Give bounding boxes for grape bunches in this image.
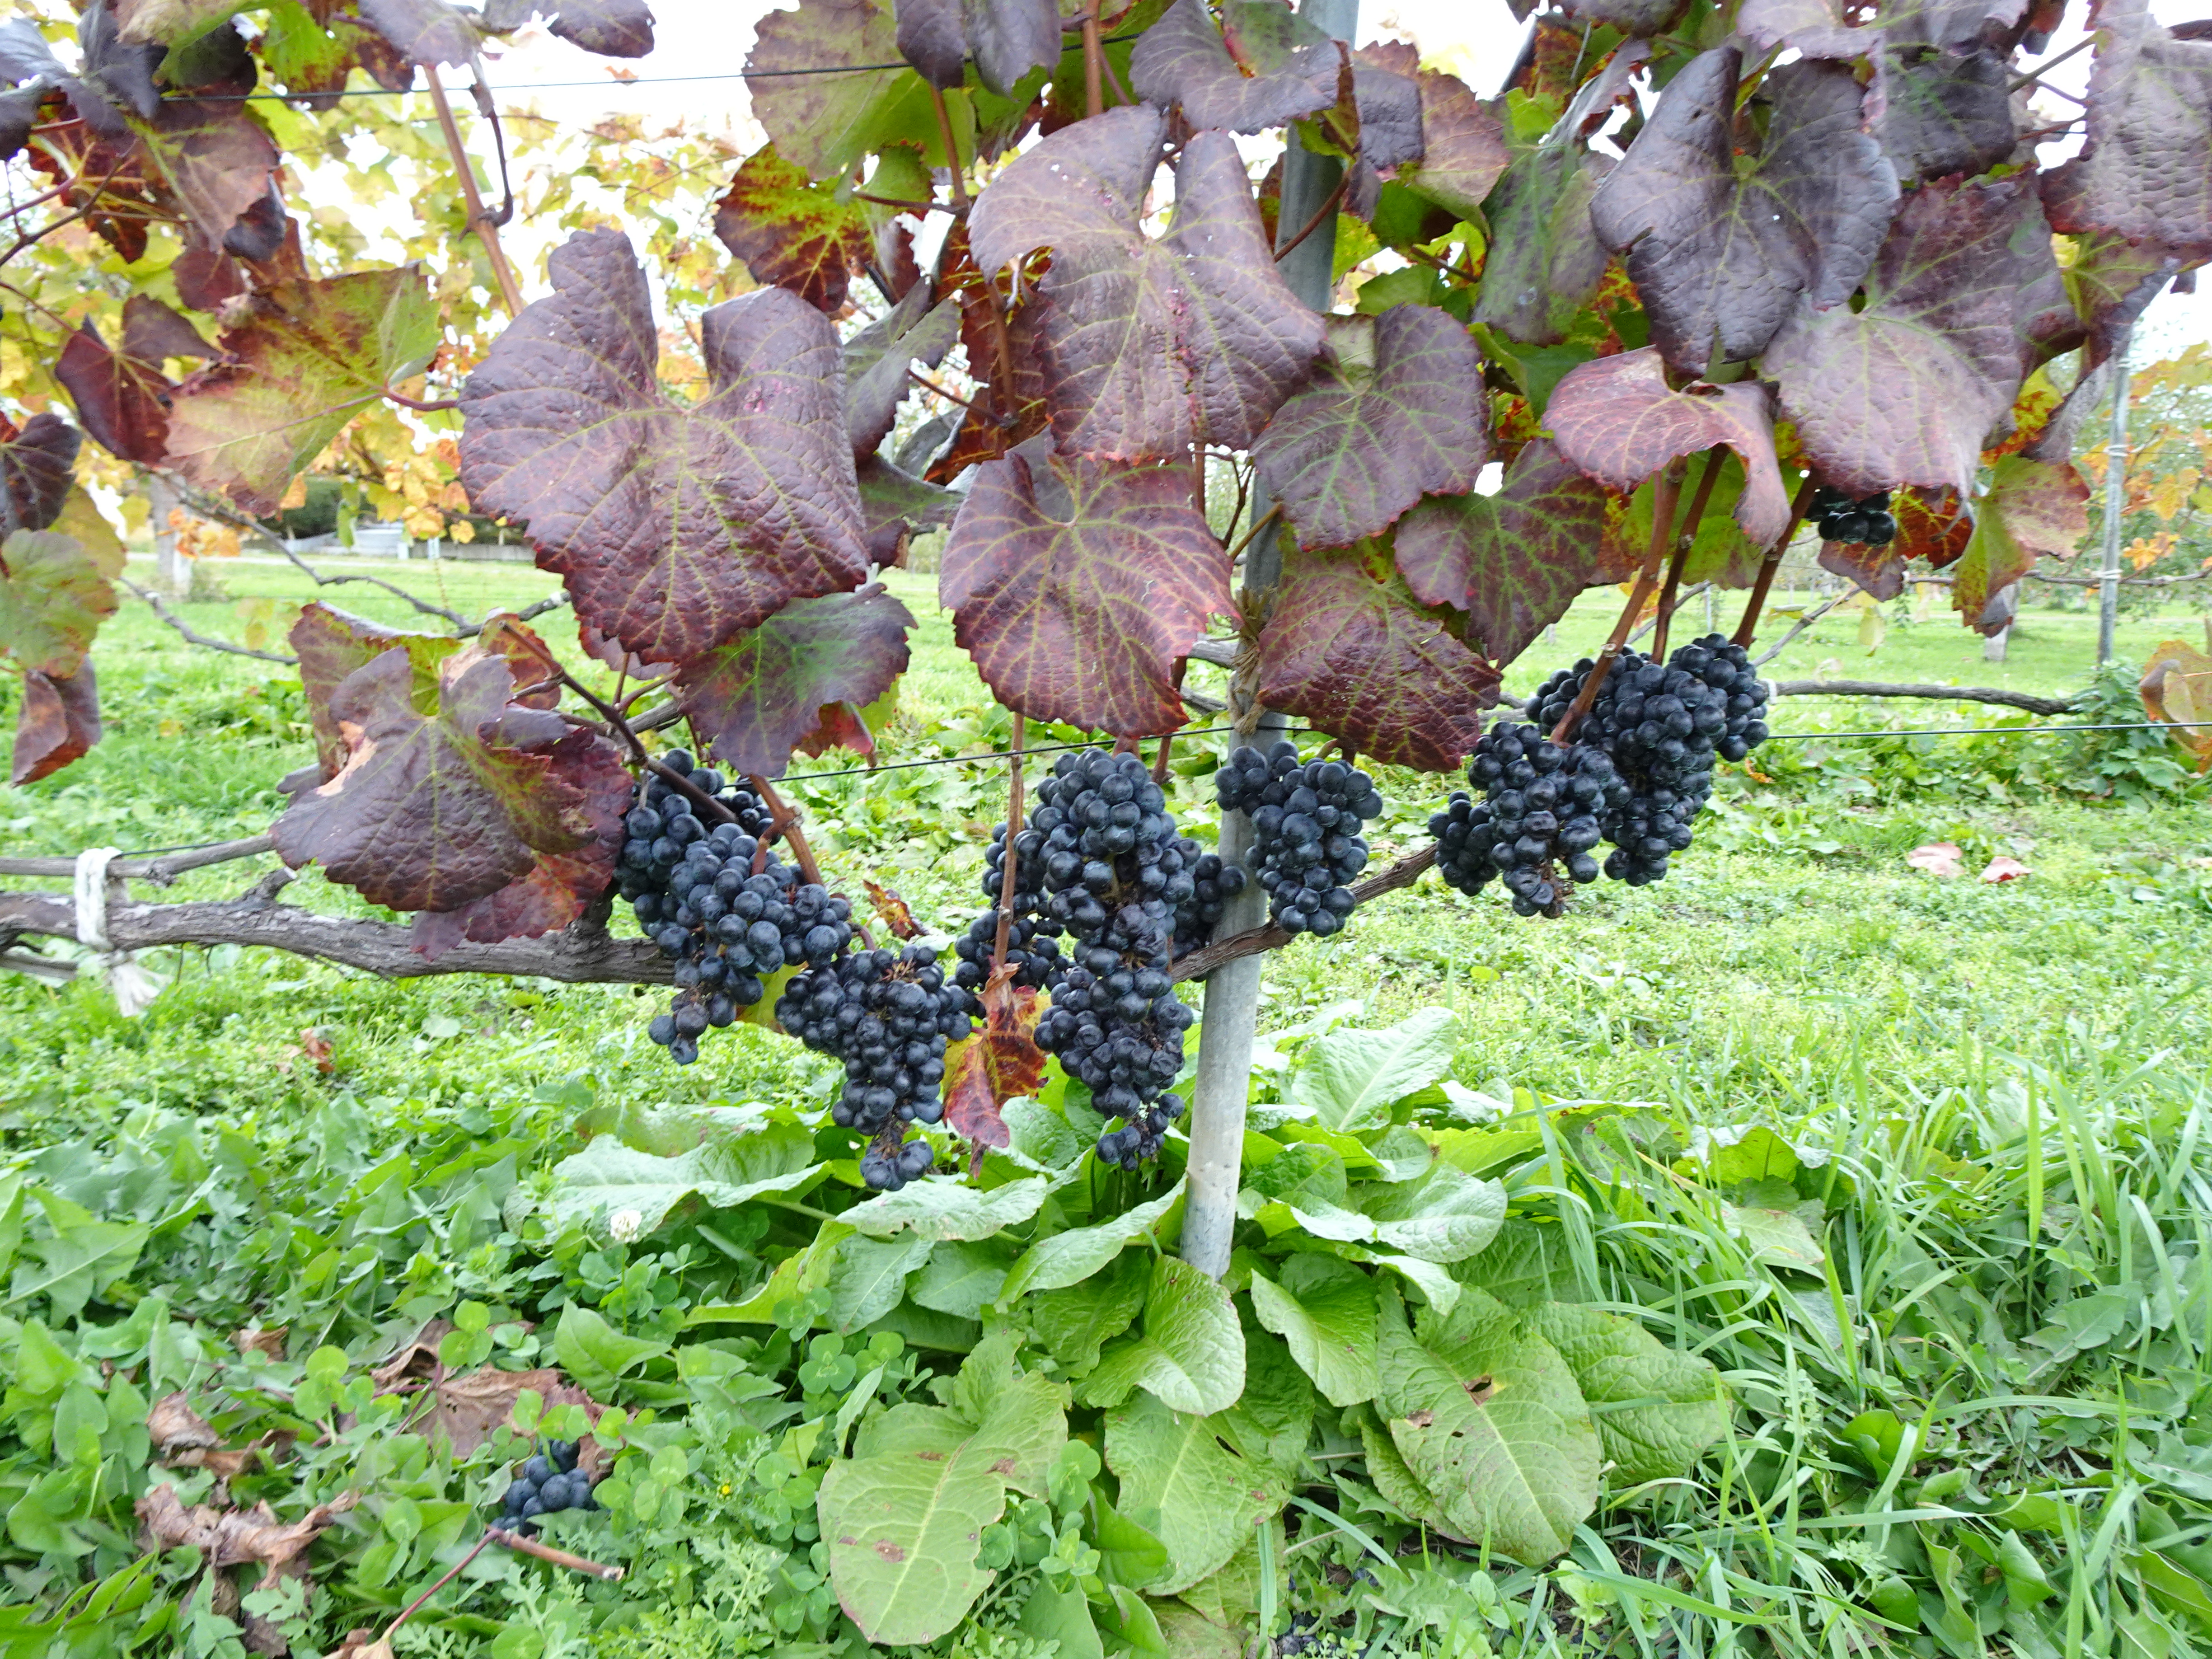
[713,773,784,845]
[775,943,972,1192]
[1526,647,1728,887]
[1668,633,1768,761]
[1804,486,1895,545]
[1212,739,1382,937]
[620,740,724,938]
[981,816,1064,938]
[1468,721,1616,918]
[494,1464,600,1590]
[1013,746,1201,975]
[945,909,1068,1017]
[649,821,811,1065]
[1173,854,1245,980]
[1427,791,1502,896]
[1033,942,1193,1171]
[775,882,854,964]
